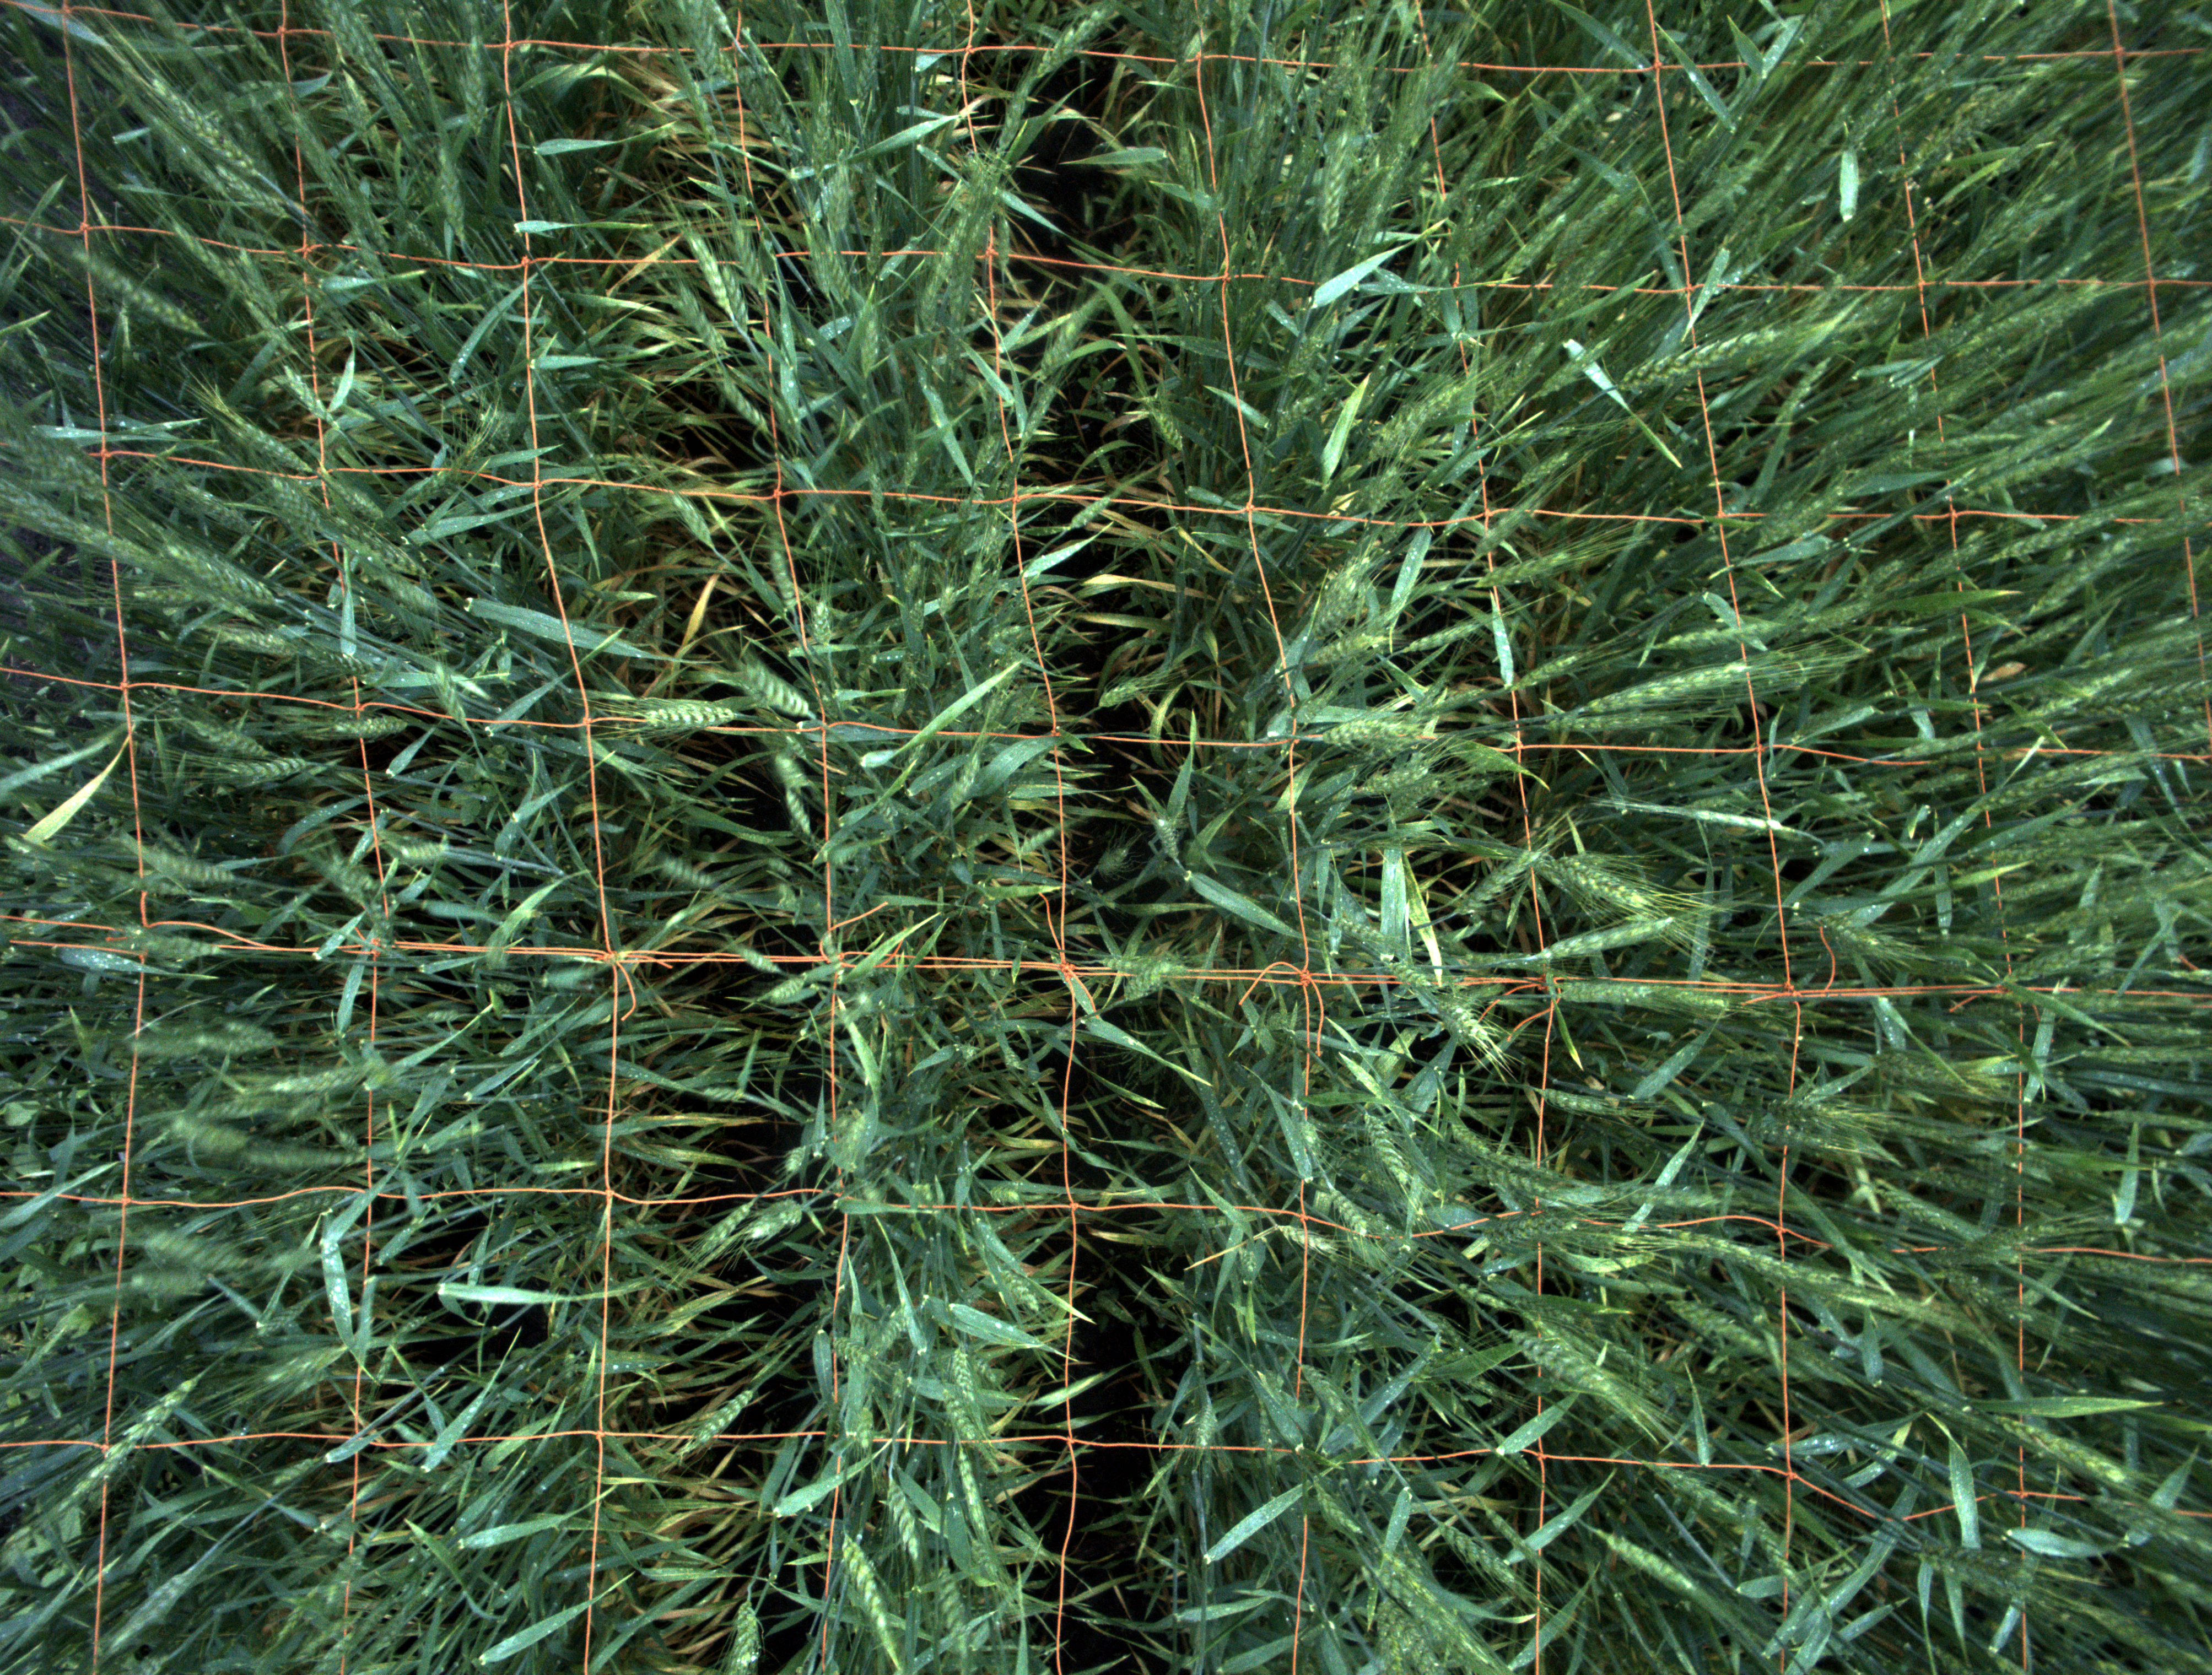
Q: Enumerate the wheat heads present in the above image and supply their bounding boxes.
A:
[1477,507,1528,555]
[723,1602,764,1675]
[858,1180,881,1206]
[1667,1302,1774,1367]
[326,850,368,905]
[376,1593,426,1646]
[289,1190,345,1216]
[1657,621,1761,655]
[294,109,325,161]
[1191,1401,1218,1447]
[1809,603,1869,632]
[1688,794,1727,812]
[2137,502,2210,542]
[266,471,332,537]
[52,1372,203,1521]
[72,247,210,339]
[1314,722,1425,749]
[288,273,359,344]
[248,304,305,364]
[806,243,829,300]
[1677,1227,1877,1309]
[82,809,124,836]
[301,147,352,208]
[247,98,285,154]
[984,1186,1020,1205]
[958,1452,985,1534]
[381,571,440,616]
[1783,1334,1855,1384]
[812,99,832,186]
[685,230,732,311]
[354,1589,396,1649]
[1511,651,1580,691]
[1438,1520,1515,1592]
[1855,558,1902,596]
[1957,421,2077,483]
[159,532,272,604]
[1472,546,1575,588]
[227,1020,276,1042]
[229,758,309,787]
[865,162,879,206]
[439,144,469,233]
[1104,950,1188,974]
[131,584,197,611]
[1065,491,1110,530]
[1257,264,1283,303]
[1966,1223,2033,1271]
[240,246,276,312]
[1938,1652,1970,1673]
[936,1568,970,1644]
[1258,1400,1273,1463]
[787,732,805,761]
[1918,1554,2015,1600]
[668,490,719,552]
[126,1271,210,1302]
[1449,1117,1491,1158]
[0,426,112,496]
[1333,915,1386,944]
[493,978,523,999]
[221,416,314,472]
[2084,1602,2206,1675]
[134,1658,159,1675]
[1620,328,1787,391]
[1461,1372,1497,1395]
[2042,814,2150,852]
[331,1541,366,1592]
[724,267,748,333]
[283,362,337,424]
[176,483,260,543]
[263,1349,344,1388]
[907,599,925,633]
[1901,1389,1996,1436]
[201,592,257,621]
[375,1336,398,1380]
[1853,78,1902,145]
[1017,387,1055,444]
[1723,1049,1780,1064]
[950,1341,976,1400]
[396,837,446,865]
[1946,1268,2031,1325]
[701,1203,751,1257]
[872,793,891,821]
[767,974,804,1005]
[1951,160,2062,276]
[1801,702,1850,732]
[1436,1002,1492,1047]
[899,564,924,598]
[1001,1267,1040,1315]
[1094,844,1131,876]
[105,1572,189,1651]
[143,1224,249,1273]
[2059,994,2129,1014]
[1911,770,1973,795]
[195,1095,285,1119]
[738,948,783,973]
[1373,770,1439,823]
[694,1388,753,1449]
[173,1116,257,1157]
[1784,224,1846,283]
[1966,900,2012,935]
[989,531,1001,565]
[1018,827,1055,856]
[258,1295,315,1339]
[717,371,770,436]
[1918,85,1994,158]
[348,226,389,288]
[1639,1462,1743,1523]
[1427,1313,1464,1356]
[709,0,735,40]
[1995,872,2078,900]
[1960,297,2058,353]
[945,205,990,360]
[1285,336,1318,383]
[1418,287,1444,331]
[1871,1050,1965,1089]
[851,1312,877,1337]
[1597,1529,1696,1599]
[841,1534,889,1631]
[1903,730,1984,760]
[1280,1223,1339,1255]
[970,1354,998,1383]
[919,212,972,336]
[2098,1021,2199,1044]
[831,1336,870,1367]
[312,859,379,891]
[152,852,240,885]
[1577,1330,1651,1372]
[144,0,187,45]
[1960,2,1989,33]
[1490,353,1537,417]
[173,213,253,296]
[704,1083,743,1101]
[2099,1660,2126,1675]
[349,182,393,245]
[2012,668,2126,727]
[331,714,413,737]
[823,164,849,234]
[1549,715,1675,731]
[350,89,374,127]
[217,627,304,659]
[1034,5,1110,80]
[1926,82,2027,169]
[1888,38,1922,74]
[937,584,957,616]
[1826,382,1974,459]
[1678,157,1759,230]
[265,1097,319,1131]
[379,89,416,138]
[2094,314,2208,373]
[142,930,223,960]
[1570,1229,1635,1245]
[1229,0,1255,45]
[885,0,898,42]
[1373,741,1417,769]
[417,455,466,498]
[1297,1363,1343,1418]
[214,167,289,218]
[1554,244,1611,313]
[1413,676,1452,723]
[1757,1097,1838,1127]
[1349,72,1370,138]
[1863,1294,1954,1334]
[1810,908,1878,950]
[2075,1254,2212,1300]
[1924,29,1967,71]
[954,521,980,551]
[1453,1146,1574,1202]
[1922,750,1980,764]
[1801,268,1846,319]
[2009,613,2081,653]
[1529,121,1569,161]
[1510,1331,1609,1394]
[1328,1187,1368,1237]
[1325,554,1368,602]
[970,1538,999,1577]
[2080,1045,2210,1069]
[2007,265,2074,308]
[127,1037,194,1063]
[364,307,411,348]
[433,663,468,729]
[1411,49,1434,103]
[1467,945,1516,969]
[1374,1570,1471,1657]
[2035,902,2125,934]
[941,1384,977,1442]
[2023,1152,2092,1185]
[338,484,386,520]
[341,0,388,71]
[869,473,885,512]
[1890,434,1969,456]
[220,5,274,65]
[1300,1121,1323,1152]
[190,1034,274,1059]
[1974,753,2125,813]
[825,246,851,300]
[147,78,252,163]
[1276,398,1314,438]
[1995,1653,2021,1670]
[178,141,222,190]
[347,105,368,147]
[293,1613,348,1663]
[1435,779,1494,792]
[1755,1517,1797,1581]
[1997,1414,2124,1485]
[729,219,769,295]
[237,1148,356,1171]
[2031,537,2133,616]
[857,989,871,1005]
[1387,956,1429,992]
[1404,624,1477,652]
[1038,319,1081,377]
[1545,338,1613,393]
[780,1142,809,1178]
[2090,1497,2209,1552]
[1752,514,1797,543]
[901,450,920,490]
[738,74,769,134]
[420,1010,460,1021]
[1694,810,1780,838]
[1315,587,1358,630]
[2104,871,2179,901]
[335,519,418,570]
[1884,1189,1980,1244]
[2069,630,2202,677]
[965,833,988,851]
[1238,1247,1256,1275]
[1246,114,1263,198]
[857,319,881,376]
[275,507,320,552]
[314,2,372,74]
[2146,1564,2211,1605]
[1669,987,1726,1014]
[974,435,995,474]
[821,932,845,974]
[2014,303,2085,348]
[1788,4,1848,76]
[499,418,513,445]
[1489,1214,1573,1250]
[808,596,830,647]
[768,550,800,608]
[318,645,376,676]
[1311,1484,1361,1535]
[965,152,992,200]
[1320,51,1349,85]
[903,657,923,687]
[997,216,1011,269]
[945,753,980,812]
[775,755,812,795]
[1488,1422,1532,1473]
[1590,668,1740,713]
[409,220,445,258]
[1502,214,1567,282]
[1988,498,2142,565]
[991,620,1024,641]
[1486,424,1575,449]
[1404,51,1458,147]
[1920,1533,2035,1591]
[0,481,151,569]
[1377,1605,1402,1675]
[1552,980,1656,1008]
[764,80,796,141]
[311,1626,363,1668]
[1099,684,1134,710]
[1453,849,1543,915]
[858,20,880,103]
[405,51,430,96]
[1313,635,1376,667]
[644,698,745,728]
[966,557,983,599]
[152,820,189,856]
[1470,187,1518,240]
[1318,148,1348,235]
[269,1454,315,1489]
[877,1313,913,1354]
[1989,203,2062,257]
[1365,1110,1408,1183]
[747,659,810,717]
[97,865,194,901]
[887,1482,920,1561]
[749,1197,802,1242]
[1545,914,1672,961]
[1975,847,2057,866]
[1894,329,1970,361]
[1516,451,1569,487]
[1279,120,1314,222]
[1482,1507,1538,1561]
[1327,56,1356,94]
[189,720,270,762]
[677,49,718,140]
[1888,1166,1988,1197]
[1155,816,1182,863]
[2074,675,2208,715]
[835,849,860,868]
[906,743,925,768]
[1382,1553,1489,1660]
[843,1115,864,1152]
[662,861,715,885]
[1386,1598,1437,1670]
[867,226,883,275]
[1458,1281,1511,1310]
[1610,1181,1720,1216]
[679,280,721,358]
[1551,190,1621,262]
[2002,0,2089,65]
[1358,172,1393,251]
[1541,853,1648,909]
[1369,385,1458,462]
[1913,542,1978,584]
[2102,1107,2209,1131]
[1203,214,1217,240]
[1266,1012,1294,1034]
[1177,144,1196,194]
[2081,973,2120,995]
[2006,943,2115,980]
[855,1405,872,1453]
[1446,685,1490,701]
[1363,468,1395,518]
[2134,350,2207,395]
[1749,1121,1829,1161]
[1537,254,1585,307]
[267,1065,370,1097]
[1981,389,2068,431]
[785,790,812,837]
[769,860,794,876]
[1516,1296,1575,1325]
[998,78,1034,154]
[1120,960,1163,1004]
[985,687,1010,735]
[396,1312,427,1336]
[1152,411,1186,453]
[1439,140,1502,215]
[463,31,486,132]
[1974,443,2094,497]
[1010,706,1036,724]
[891,1367,905,1399]
[689,22,735,85]
[1893,635,1963,661]
[1874,1113,1981,1156]
[1777,357,1830,421]
[1804,69,1840,109]
[1540,1086,1607,1116]
[1759,487,1845,548]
